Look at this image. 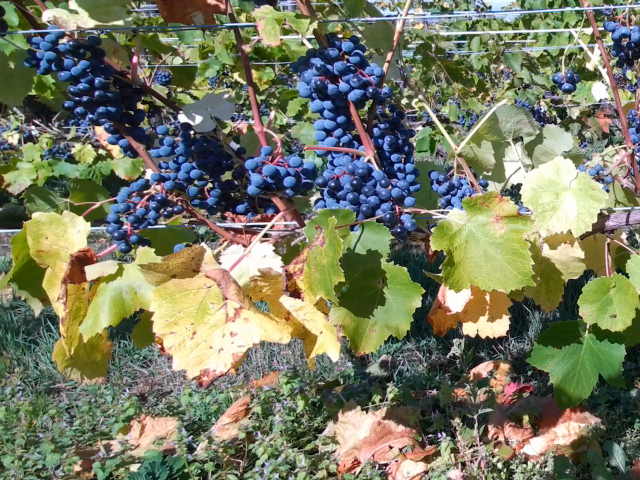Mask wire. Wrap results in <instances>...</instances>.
<instances>
[{
	"label": "wire",
	"mask_w": 640,
	"mask_h": 480,
	"mask_svg": "<svg viewBox=\"0 0 640 480\" xmlns=\"http://www.w3.org/2000/svg\"><path fill=\"white\" fill-rule=\"evenodd\" d=\"M255 21L250 22H221V23H205L198 25H149V26H133V25H116L103 28H86V27H54V28H38L30 30H3L0 36L5 35H32L40 33H56V32H84V33H106L108 31L131 30V31H154V30H200L207 28H225V27H253Z\"/></svg>",
	"instance_id": "2"
},
{
	"label": "wire",
	"mask_w": 640,
	"mask_h": 480,
	"mask_svg": "<svg viewBox=\"0 0 640 480\" xmlns=\"http://www.w3.org/2000/svg\"><path fill=\"white\" fill-rule=\"evenodd\" d=\"M600 10H623V11H640V2L631 3L630 6L625 5H598L593 7H579V8H551V9H538V10H515V11H500V12H468L461 14H437L432 16L423 15H409V14H385L375 17H339L334 19H323V24H337L341 22H377L388 19H407V20H421V21H434L439 19H463L470 17H503V16H529L540 14H554V13H582V12H596Z\"/></svg>",
	"instance_id": "1"
},
{
	"label": "wire",
	"mask_w": 640,
	"mask_h": 480,
	"mask_svg": "<svg viewBox=\"0 0 640 480\" xmlns=\"http://www.w3.org/2000/svg\"><path fill=\"white\" fill-rule=\"evenodd\" d=\"M254 225H264V226H268L269 222L266 220H252V221H241V222H237V223H224V222H218L217 226L221 227V228H229V229H236L239 227H244V226H254Z\"/></svg>",
	"instance_id": "3"
}]
</instances>
